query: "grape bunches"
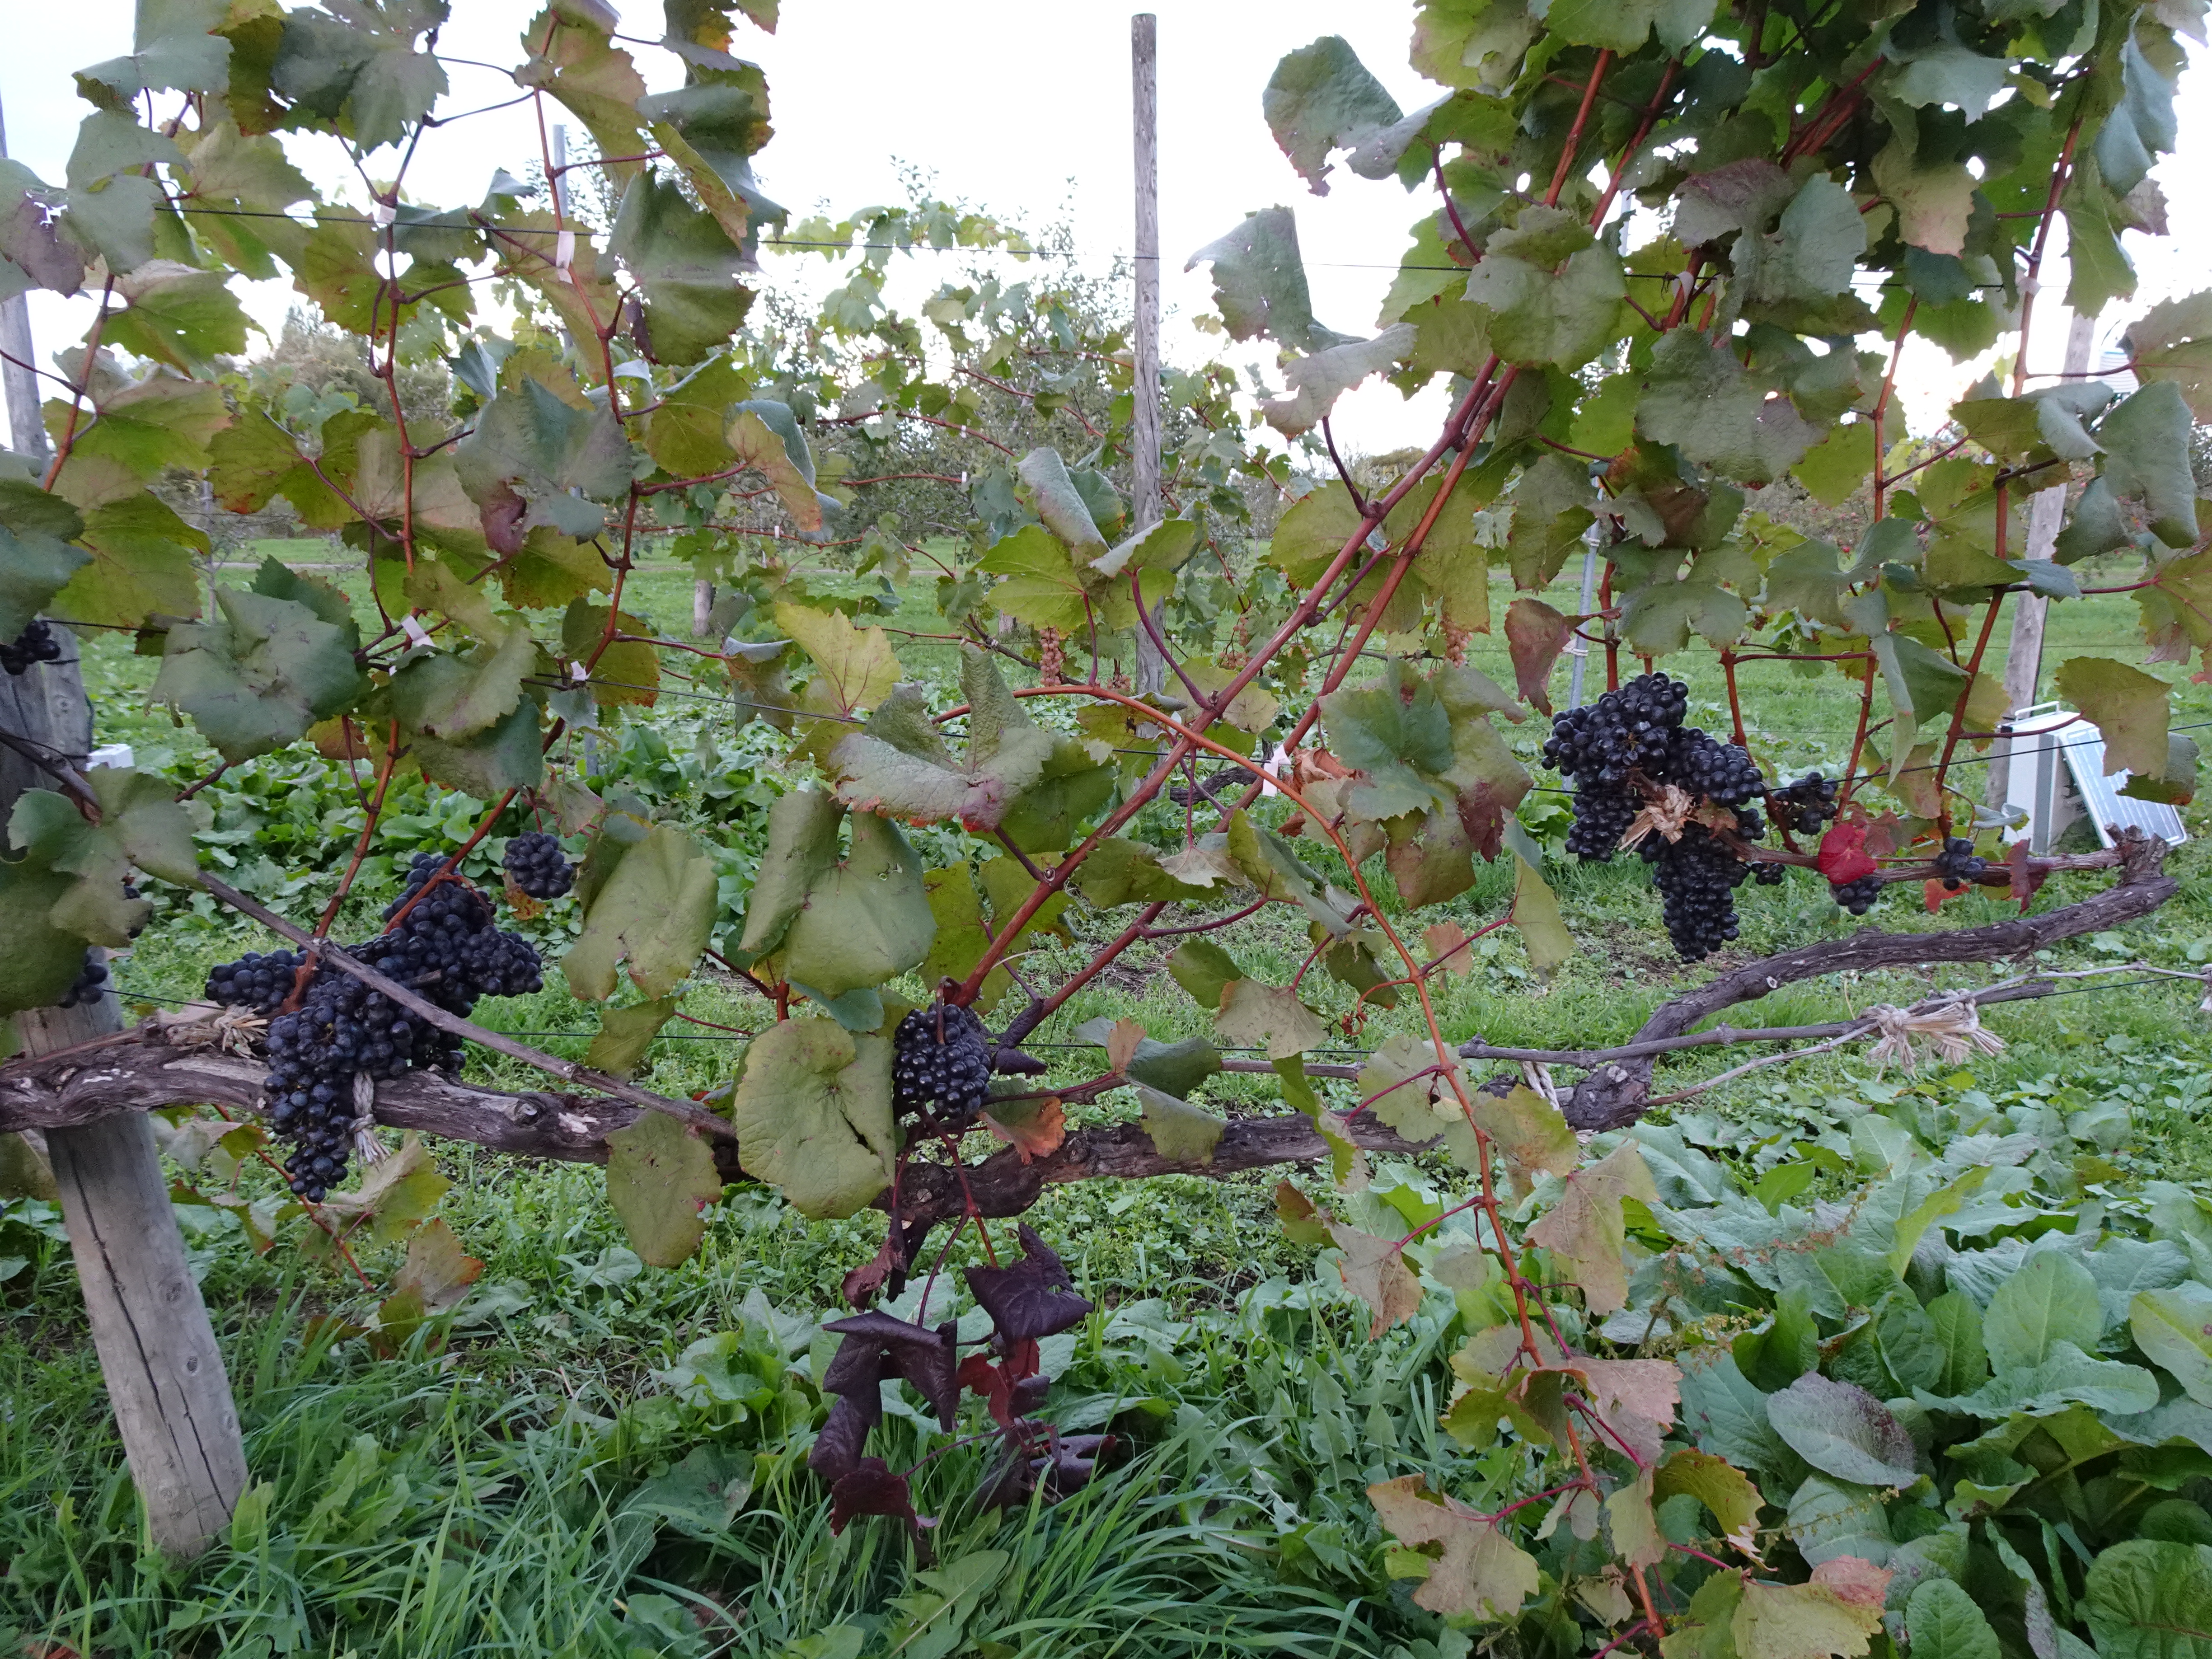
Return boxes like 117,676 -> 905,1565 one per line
123,884 -> 159,943
1647,828 -> 1748,963
1752,858 -> 1787,888
336,882 -> 498,981
1105,668 -> 1137,708
1930,834 -> 1991,893
1,608 -> 69,681
1735,807 -> 1768,842
50,936 -> 112,1010
1285,639 -> 1322,687
1437,597 -> 1477,673
376,851 -> 459,922
892,1002 -> 999,1120
307,956 -> 429,1077
1217,607 -> 1258,679
1598,669 -> 1688,805
264,1006 -> 364,1205
499,833 -> 575,897
1032,621 -> 1075,698
1542,698 -> 1643,865
422,979 -> 479,1075
1769,767 -> 1849,839
875,1163 -> 953,1211
1828,871 -> 1887,919
461,929 -> 544,997
201,948 -> 319,1022
1662,725 -> 1773,806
